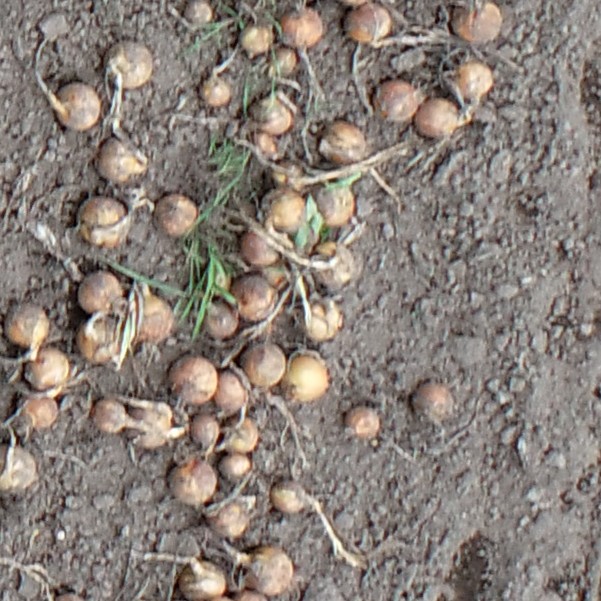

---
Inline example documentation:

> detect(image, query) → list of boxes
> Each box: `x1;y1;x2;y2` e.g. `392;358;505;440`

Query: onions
167;356;219;404
204;302;236;336
80;194;126;245
258;261;288;289
376;80;418;121
0;447;37;492
270;479;305;513
57;591;84;601
315;186;354;225
4;303;51;349
186;2;210;22
409;378;452;421
137;292;173;343
302;300;339;340
280;8;324;47
220;452;250;478
105;43;153;86
449;4;501;43
27;347;69;390
155;194;196;238
131;406;176;448
232;275;276;319
271;47;297;73
448;61;491;101
177;560;225;598
341;404;378;440
265;192;304;233
92;397;127;435
77;271;121;312
274;161;306;193
223;419;257;453
197;75;231;108
241;232;279;269
79;317;119;360
282;350;329;399
15;394;57;432
310;242;354;288
414;98;459;138
246;546;294;593
54;83;100;130
239;21;273;54
252;98;291;134
233;588;266;601
167;460;219;506
208;498;249;538
320;119;366;165
211;371;249;413
252;132;280;159
342;4;394;42
97;138;146;182
343;0;369;7
240;344;286;386
210;594;234;601
189;414;221;445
